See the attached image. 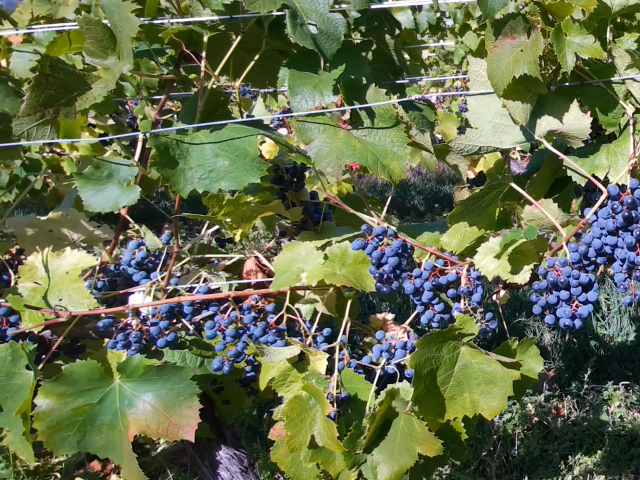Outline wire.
<instances>
[{
	"instance_id": "wire-1",
	"label": "wire",
	"mask_w": 640,
	"mask_h": 480,
	"mask_svg": "<svg viewBox=\"0 0 640 480\" xmlns=\"http://www.w3.org/2000/svg\"><path fill=\"white\" fill-rule=\"evenodd\" d=\"M488 93L494 94L495 90L493 88H485L482 90H475V91H451L447 93H430V94H421V95H415V96H402L399 98H395L393 100L377 102V103L351 104L346 106H335V107L322 108L317 110H299L295 112L281 113L277 115H263V116L255 115V116H245V117L230 118V119H218V120H213V121H208L203 123H187V124H181V125H175V126H169V127L148 128V129H143V130H139L131 133H118L113 135L98 136L91 139L45 138V139H38L33 141L0 142V148L18 147V146H35V145L48 144V143L93 144L100 141L115 140L120 138H133V137L142 136L150 133H157V132H171V131H177V130H183V129H189V128H205V127H211V126L221 125V124H233V123H241V122H248V121L279 120L283 118L297 117L302 115H319L324 113L348 111L353 109L379 108V107L395 105L404 101H417V100L432 99V98H449L453 96H477V95H484Z\"/></svg>"
},
{
	"instance_id": "wire-2",
	"label": "wire",
	"mask_w": 640,
	"mask_h": 480,
	"mask_svg": "<svg viewBox=\"0 0 640 480\" xmlns=\"http://www.w3.org/2000/svg\"><path fill=\"white\" fill-rule=\"evenodd\" d=\"M284 11H260V12H252V13H238L232 15H209V16H190V17H181V18H169V17H152V16H141L140 20L144 21L145 24H172V23H183V22H192V21H212V20H234L240 18H253V17H262V16H284Z\"/></svg>"
},
{
	"instance_id": "wire-3",
	"label": "wire",
	"mask_w": 640,
	"mask_h": 480,
	"mask_svg": "<svg viewBox=\"0 0 640 480\" xmlns=\"http://www.w3.org/2000/svg\"><path fill=\"white\" fill-rule=\"evenodd\" d=\"M79 30L80 26L76 22H54L43 23L31 26H2L0 36H19L22 34H39L46 32H65Z\"/></svg>"
},
{
	"instance_id": "wire-4",
	"label": "wire",
	"mask_w": 640,
	"mask_h": 480,
	"mask_svg": "<svg viewBox=\"0 0 640 480\" xmlns=\"http://www.w3.org/2000/svg\"><path fill=\"white\" fill-rule=\"evenodd\" d=\"M633 79H640V74H631L625 77L622 76H602V77H596V78H583V79H579V80H574V81H564V82H558L557 86L558 87H566V86H576V85H581V84H585V83H598V82H604V81H618V82H627Z\"/></svg>"
},
{
	"instance_id": "wire-5",
	"label": "wire",
	"mask_w": 640,
	"mask_h": 480,
	"mask_svg": "<svg viewBox=\"0 0 640 480\" xmlns=\"http://www.w3.org/2000/svg\"><path fill=\"white\" fill-rule=\"evenodd\" d=\"M432 0L421 1H387L382 3H375L370 6L371 10L383 9V8H404V7H423L432 5Z\"/></svg>"
},
{
	"instance_id": "wire-6",
	"label": "wire",
	"mask_w": 640,
	"mask_h": 480,
	"mask_svg": "<svg viewBox=\"0 0 640 480\" xmlns=\"http://www.w3.org/2000/svg\"><path fill=\"white\" fill-rule=\"evenodd\" d=\"M273 282L274 278L272 276L266 277H250L247 279H229V280H210L206 282L207 286L212 285H232V284H249L253 282Z\"/></svg>"
},
{
	"instance_id": "wire-7",
	"label": "wire",
	"mask_w": 640,
	"mask_h": 480,
	"mask_svg": "<svg viewBox=\"0 0 640 480\" xmlns=\"http://www.w3.org/2000/svg\"><path fill=\"white\" fill-rule=\"evenodd\" d=\"M350 7H351L350 3H341V4H338L336 6L331 7L330 11L331 12H335V11H339V10H347Z\"/></svg>"
}]
</instances>
